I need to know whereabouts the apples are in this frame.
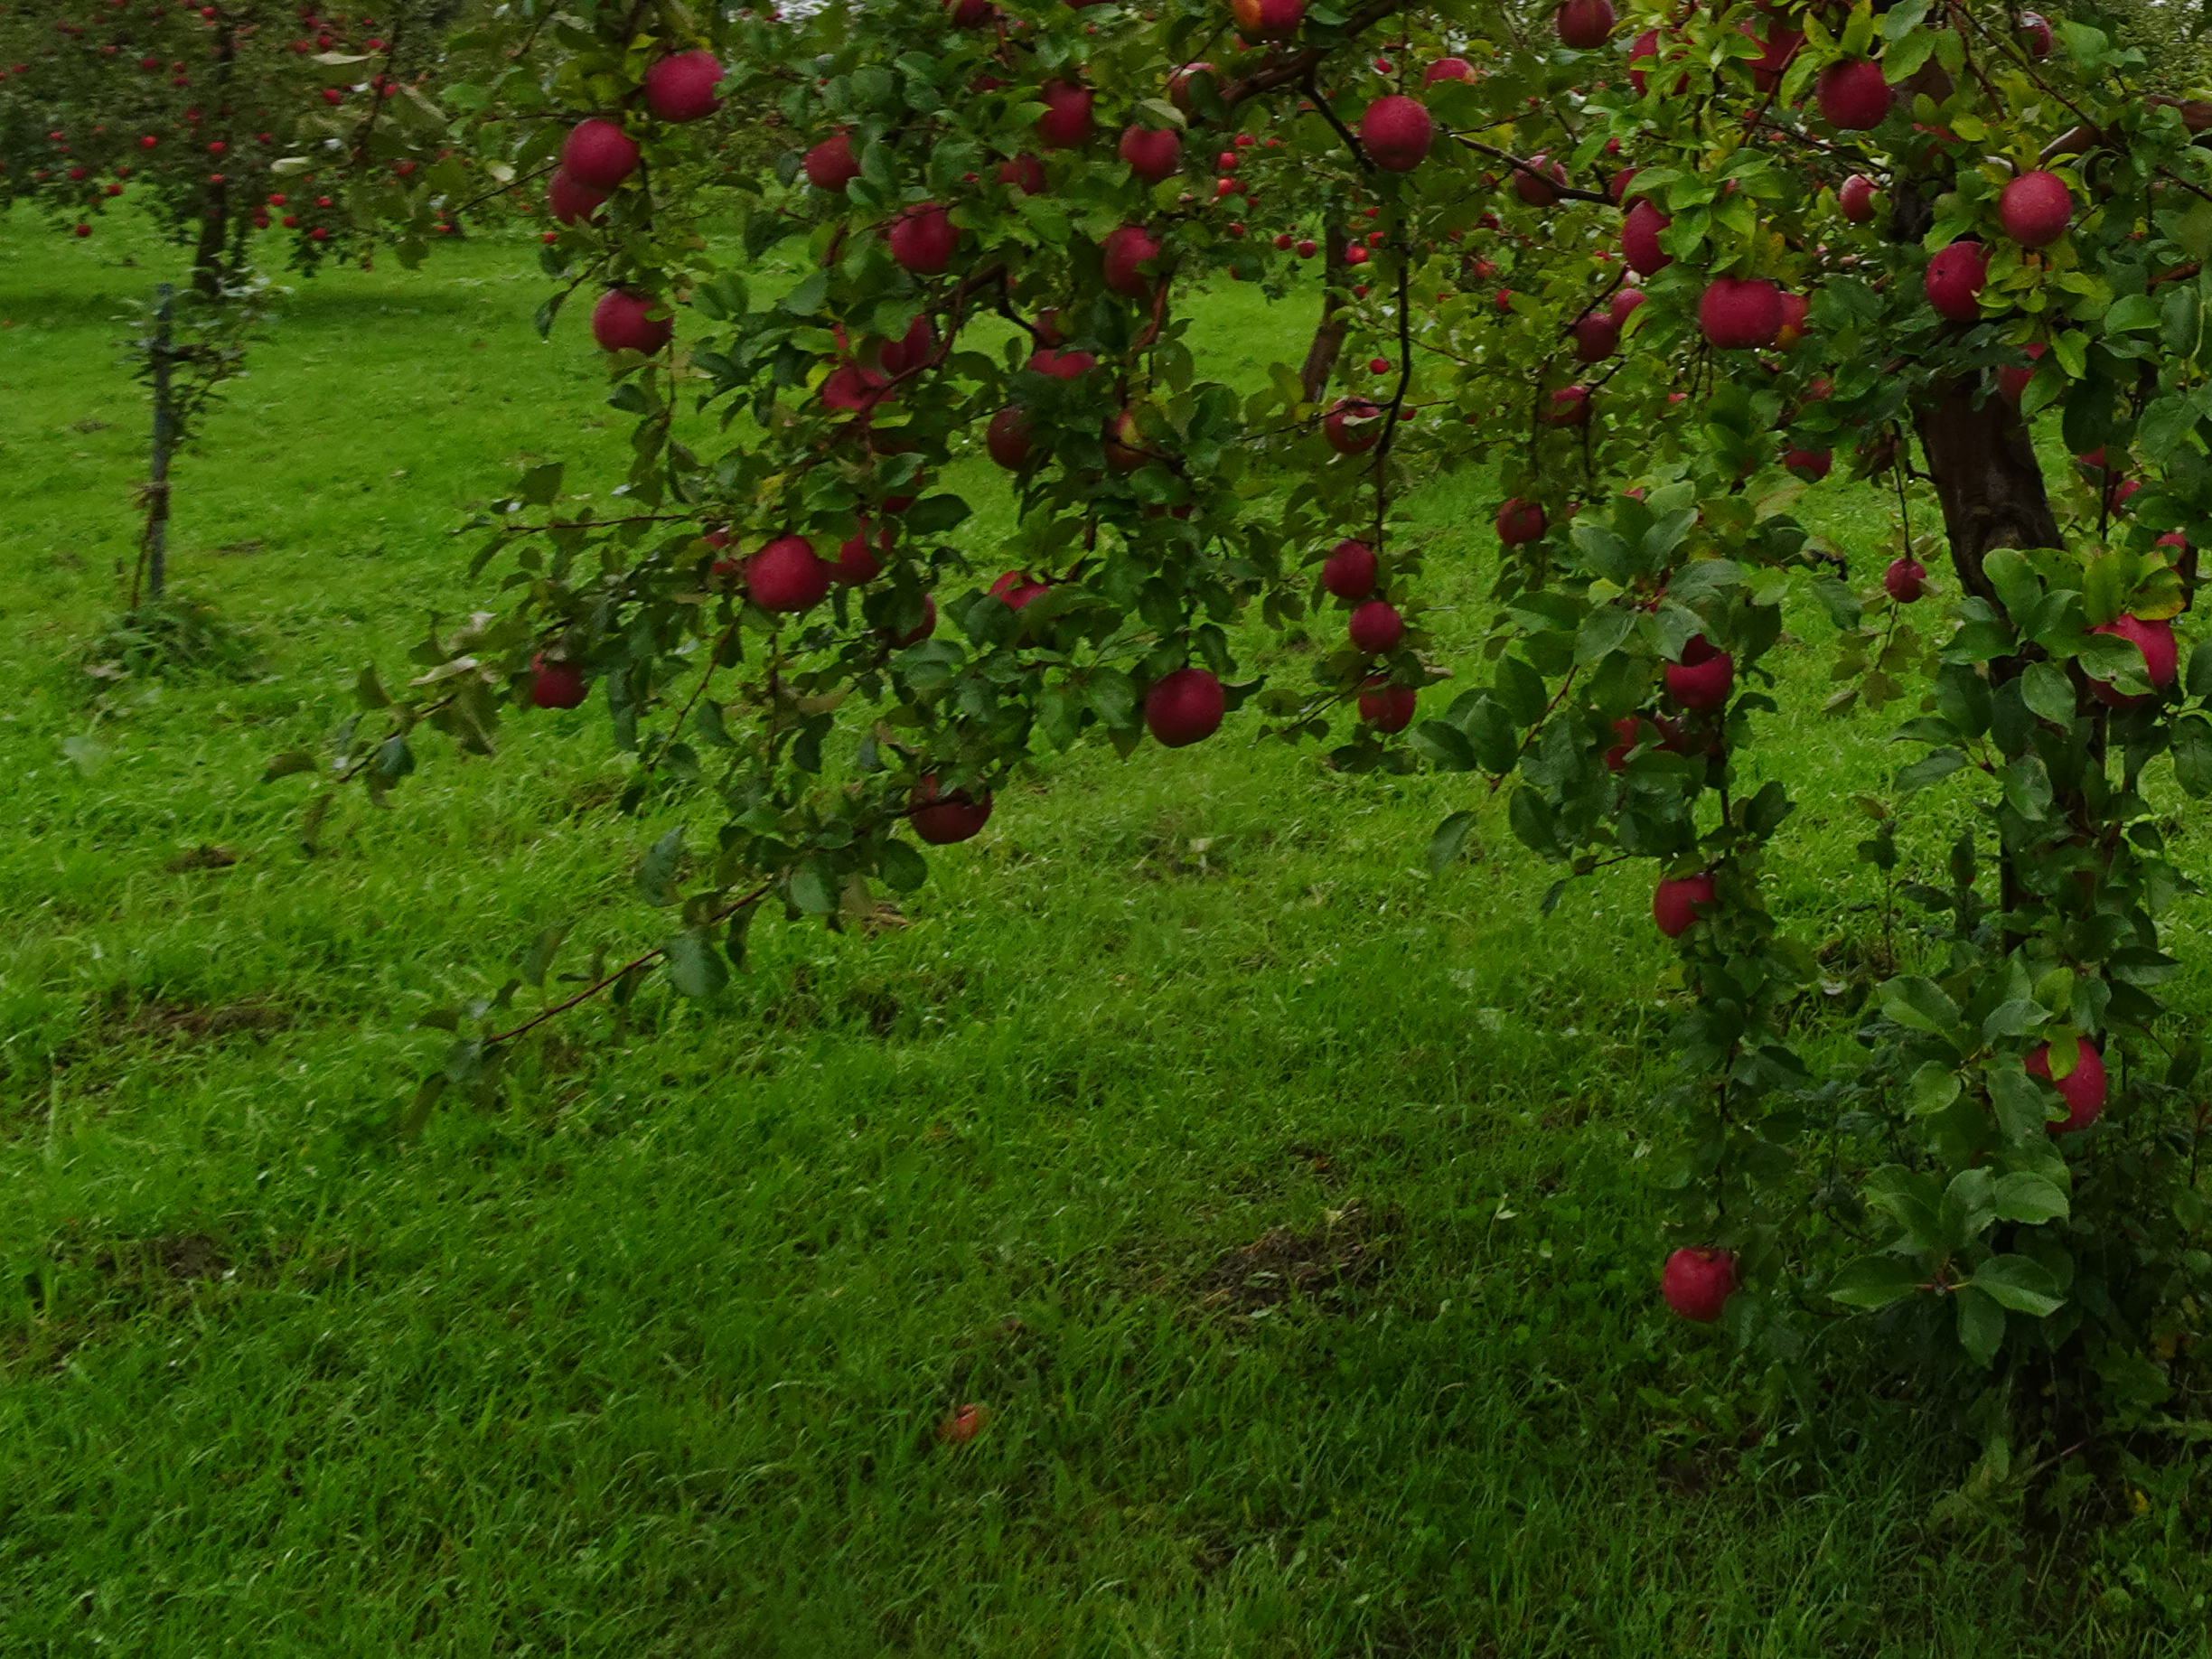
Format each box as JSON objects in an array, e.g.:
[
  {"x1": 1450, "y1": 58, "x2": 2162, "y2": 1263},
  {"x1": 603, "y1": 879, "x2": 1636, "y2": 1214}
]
[
  {"x1": 924, "y1": 0, "x2": 1001, "y2": 21},
  {"x1": 822, "y1": 367, "x2": 896, "y2": 413},
  {"x1": 1104, "y1": 227, "x2": 1162, "y2": 296},
  {"x1": 831, "y1": 322, "x2": 849, "y2": 351},
  {"x1": 1621, "y1": 199, "x2": 1674, "y2": 277},
  {"x1": 2108, "y1": 480, "x2": 2141, "y2": 516},
  {"x1": 880, "y1": 315, "x2": 930, "y2": 378},
  {"x1": 1999, "y1": 171, "x2": 2072, "y2": 248},
  {"x1": 819, "y1": 517, "x2": 891, "y2": 586},
  {"x1": 561, "y1": 117, "x2": 641, "y2": 190},
  {"x1": 1324, "y1": 396, "x2": 1381, "y2": 454},
  {"x1": 1785, "y1": 445, "x2": 1832, "y2": 478},
  {"x1": 2020, "y1": 12, "x2": 2051, "y2": 61},
  {"x1": 1362, "y1": 96, "x2": 1432, "y2": 172},
  {"x1": 1145, "y1": 668, "x2": 1224, "y2": 748},
  {"x1": 1999, "y1": 341, "x2": 2047, "y2": 412},
  {"x1": 1169, "y1": 62, "x2": 1231, "y2": 110},
  {"x1": 532, "y1": 649, "x2": 591, "y2": 710},
  {"x1": 745, "y1": 534, "x2": 828, "y2": 612},
  {"x1": 1323, "y1": 541, "x2": 1376, "y2": 600},
  {"x1": 1662, "y1": 1247, "x2": 1734, "y2": 1324},
  {"x1": 593, "y1": 288, "x2": 674, "y2": 358},
  {"x1": 1768, "y1": 290, "x2": 1812, "y2": 356},
  {"x1": 1544, "y1": 385, "x2": 1585, "y2": 422},
  {"x1": 1424, "y1": 60, "x2": 1477, "y2": 92},
  {"x1": 909, "y1": 772, "x2": 992, "y2": 844},
  {"x1": 1570, "y1": 313, "x2": 1617, "y2": 362},
  {"x1": 1840, "y1": 173, "x2": 1879, "y2": 226},
  {"x1": 988, "y1": 570, "x2": 1052, "y2": 611},
  {"x1": 1515, "y1": 155, "x2": 1565, "y2": 207},
  {"x1": 545, "y1": 166, "x2": 612, "y2": 229},
  {"x1": 1925, "y1": 242, "x2": 1994, "y2": 322},
  {"x1": 2087, "y1": 613, "x2": 2176, "y2": 708},
  {"x1": 1349, "y1": 602, "x2": 1402, "y2": 654},
  {"x1": 1558, "y1": 0, "x2": 1614, "y2": 49},
  {"x1": 1817, "y1": 57, "x2": 1892, "y2": 131},
  {"x1": 645, "y1": 50, "x2": 723, "y2": 124},
  {"x1": 1032, "y1": 77, "x2": 1093, "y2": 146},
  {"x1": 1032, "y1": 310, "x2": 1066, "y2": 351},
  {"x1": 876, "y1": 441, "x2": 922, "y2": 511},
  {"x1": 1497, "y1": 499, "x2": 1543, "y2": 545},
  {"x1": 1654, "y1": 873, "x2": 1725, "y2": 939},
  {"x1": 1603, "y1": 718, "x2": 1643, "y2": 770},
  {"x1": 1610, "y1": 167, "x2": 1647, "y2": 204},
  {"x1": 1116, "y1": 123, "x2": 1179, "y2": 185},
  {"x1": 2022, "y1": 1039, "x2": 2105, "y2": 1131},
  {"x1": 996, "y1": 155, "x2": 1043, "y2": 196},
  {"x1": 1609, "y1": 288, "x2": 1647, "y2": 332},
  {"x1": 904, "y1": 594, "x2": 936, "y2": 644},
  {"x1": 1027, "y1": 349, "x2": 1098, "y2": 380},
  {"x1": 702, "y1": 532, "x2": 736, "y2": 573},
  {"x1": 805, "y1": 135, "x2": 863, "y2": 193},
  {"x1": 1358, "y1": 672, "x2": 1416, "y2": 735},
  {"x1": 2079, "y1": 445, "x2": 2117, "y2": 486},
  {"x1": 1666, "y1": 633, "x2": 1720, "y2": 667},
  {"x1": 1738, "y1": 22, "x2": 1810, "y2": 96},
  {"x1": 1884, "y1": 558, "x2": 1926, "y2": 604},
  {"x1": 2156, "y1": 533, "x2": 2186, "y2": 573},
  {"x1": 969, "y1": 73, "x2": 1009, "y2": 90},
  {"x1": 891, "y1": 203, "x2": 959, "y2": 276},
  {"x1": 987, "y1": 406, "x2": 1054, "y2": 471},
  {"x1": 1231, "y1": 0, "x2": 1302, "y2": 42},
  {"x1": 1800, "y1": 380, "x2": 1835, "y2": 405},
  {"x1": 1700, "y1": 279, "x2": 1784, "y2": 350},
  {"x1": 1629, "y1": 28, "x2": 1691, "y2": 97},
  {"x1": 1111, "y1": 409, "x2": 1143, "y2": 462},
  {"x1": 1666, "y1": 652, "x2": 1734, "y2": 711}
]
